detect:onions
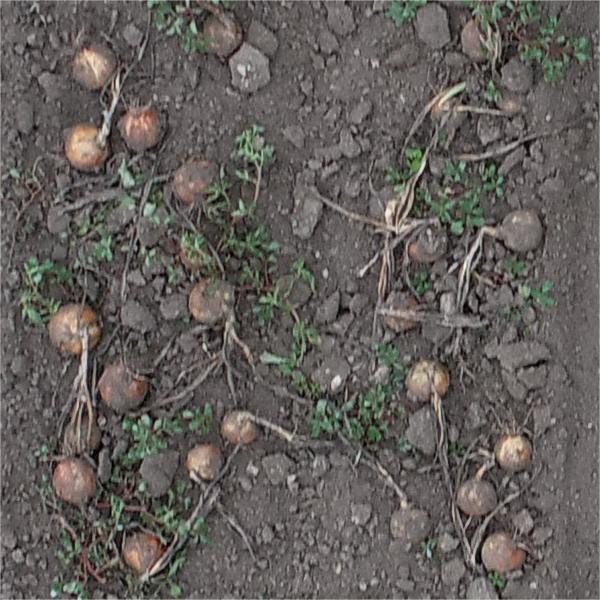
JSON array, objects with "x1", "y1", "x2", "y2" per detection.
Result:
[
  {"x1": 51, "y1": 457, "x2": 97, "y2": 503},
  {"x1": 182, "y1": 444, "x2": 220, "y2": 481},
  {"x1": 427, "y1": 84, "x2": 461, "y2": 120},
  {"x1": 170, "y1": 158, "x2": 217, "y2": 206},
  {"x1": 119, "y1": 107, "x2": 161, "y2": 149},
  {"x1": 222, "y1": 409, "x2": 255, "y2": 444},
  {"x1": 453, "y1": 477, "x2": 495, "y2": 516},
  {"x1": 493, "y1": 432, "x2": 530, "y2": 468},
  {"x1": 187, "y1": 278, "x2": 232, "y2": 322},
  {"x1": 58, "y1": 401, "x2": 97, "y2": 453},
  {"x1": 408, "y1": 223, "x2": 446, "y2": 263},
  {"x1": 48, "y1": 305, "x2": 99, "y2": 353},
  {"x1": 119, "y1": 531, "x2": 162, "y2": 573},
  {"x1": 496, "y1": 91, "x2": 525, "y2": 116},
  {"x1": 69, "y1": 43, "x2": 114, "y2": 86},
  {"x1": 98, "y1": 362, "x2": 147, "y2": 410},
  {"x1": 498, "y1": 208, "x2": 542, "y2": 253},
  {"x1": 479, "y1": 531, "x2": 521, "y2": 573},
  {"x1": 462, "y1": 20, "x2": 494, "y2": 60},
  {"x1": 63, "y1": 124, "x2": 105, "y2": 168},
  {"x1": 388, "y1": 507, "x2": 427, "y2": 544},
  {"x1": 380, "y1": 294, "x2": 414, "y2": 333},
  {"x1": 409, "y1": 360, "x2": 451, "y2": 398},
  {"x1": 499, "y1": 60, "x2": 531, "y2": 91}
]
